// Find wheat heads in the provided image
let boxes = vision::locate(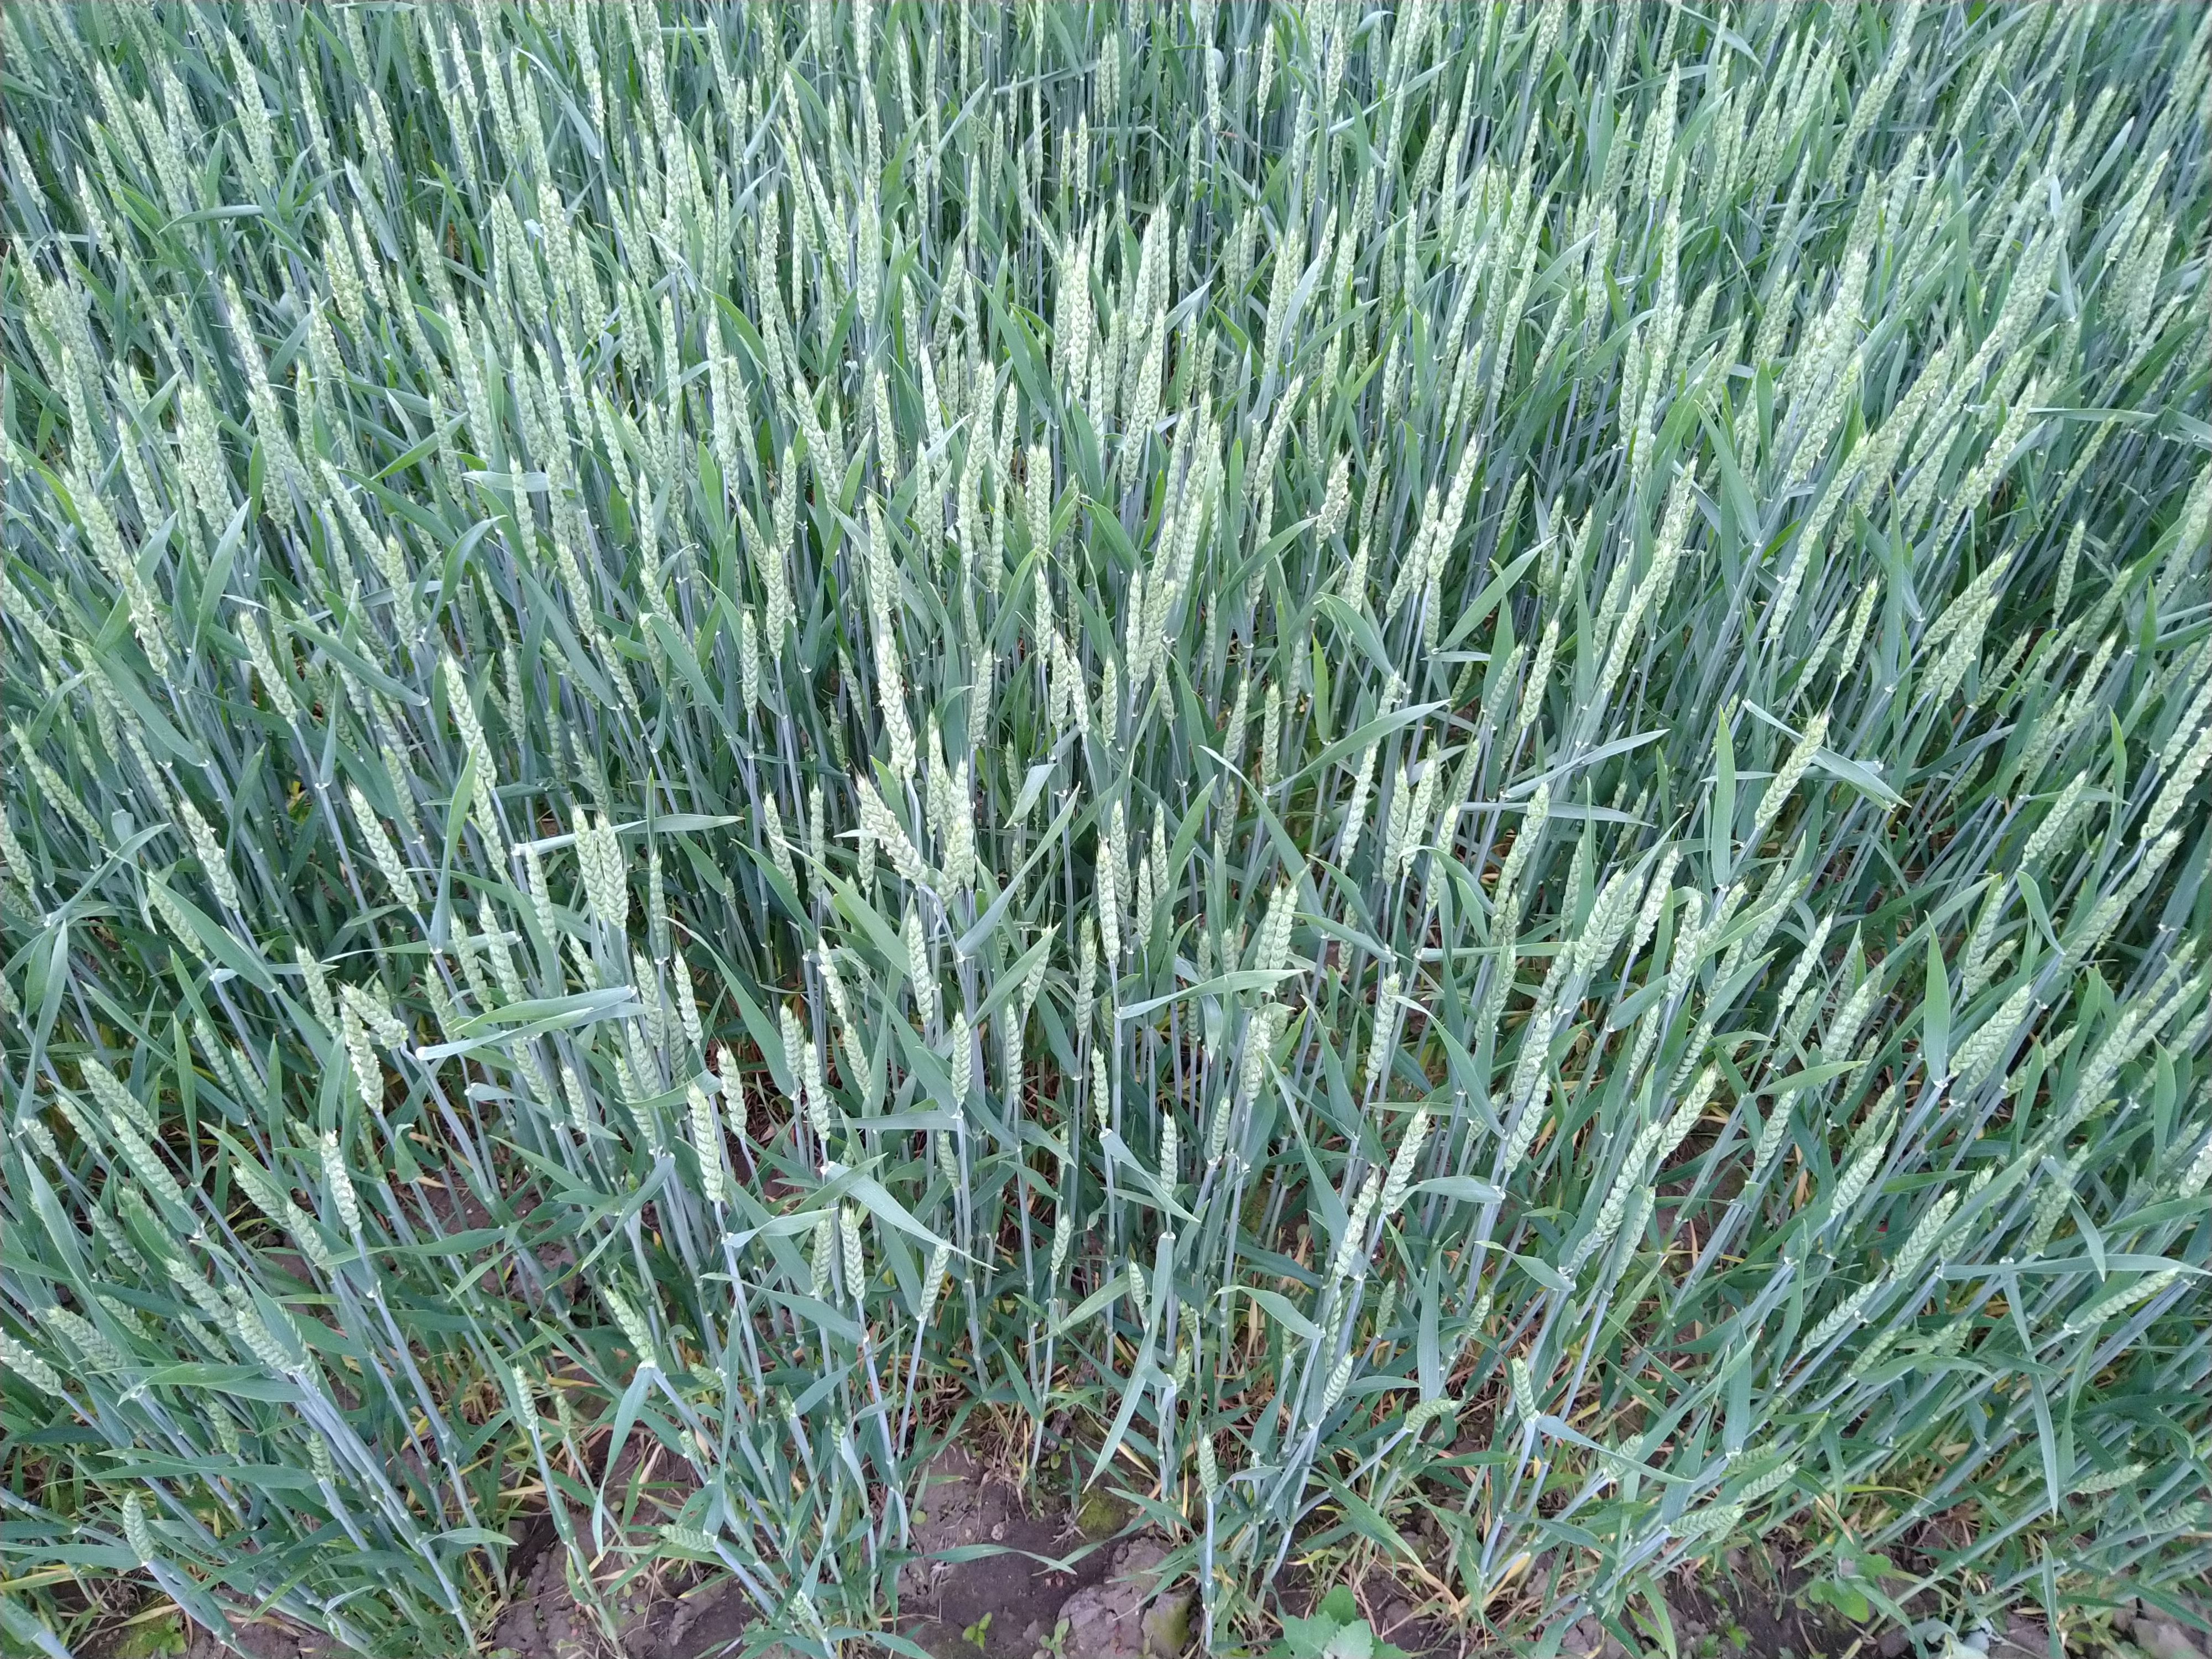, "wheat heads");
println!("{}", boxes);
[551,192,577,285]
[626,1172,640,1193]
[1672,287,1715,381]
[1967,940,2016,994]
[1451,660,1474,707]
[452,25,478,116]
[164,82,187,171]
[493,126,511,172]
[354,105,388,198]
[639,192,671,263]
[1089,354,1103,456]
[1755,141,1786,216]
[1384,86,1405,176]
[1497,472,1529,545]
[794,383,841,509]
[915,442,931,535]
[1381,229,1396,315]
[1199,330,1217,393]
[1257,24,1274,115]
[226,31,270,131]
[1061,127,1070,187]
[1633,849,1681,947]
[542,638,599,707]
[224,1286,293,1369]
[938,765,974,906]
[1793,611,1847,694]
[1833,444,1898,547]
[1284,232,1299,304]
[1305,208,1338,310]
[1829,0,1847,28]
[1810,437,1870,528]
[1574,875,1626,972]
[666,484,686,520]
[1499,170,1509,206]
[1618,330,1641,443]
[2029,1093,2119,1150]
[1505,171,1532,240]
[1560,509,1593,606]
[1617,791,1649,850]
[1736,1464,1797,1502]
[1977,153,2028,225]
[1715,53,1730,99]
[817,940,859,1048]
[1500,1,1524,48]
[96,70,124,149]
[1111,35,1120,103]
[471,484,491,520]
[1358,451,1382,539]
[0,881,43,927]
[269,596,291,666]
[1307,399,1320,471]
[615,1057,656,1147]
[1522,621,1559,724]
[0,1331,62,1394]
[575,232,604,332]
[1231,917,1246,971]
[89,681,120,761]
[717,1093,748,1135]
[746,220,756,289]
[130,369,178,466]
[138,3,169,56]
[738,506,769,583]
[1224,680,1249,761]
[840,1208,865,1297]
[806,161,842,258]
[303,666,360,752]
[1758,37,1795,129]
[1035,446,1052,561]
[762,316,788,419]
[810,786,825,886]
[1725,110,1746,188]
[281,267,305,320]
[1163,417,1189,520]
[338,662,369,719]
[575,0,594,85]
[385,272,409,336]
[179,390,197,467]
[1363,168,1376,236]
[1593,555,1629,655]
[1606,1436,1644,1478]
[1198,932,1212,982]
[850,539,861,604]
[47,1309,128,1371]
[1474,948,1517,1049]
[194,390,217,440]
[1152,804,1170,900]
[1837,951,1857,1010]
[27,1190,45,1220]
[1333,230,1357,316]
[1949,988,2032,1076]
[34,2,70,67]
[310,335,338,426]
[938,780,953,850]
[1534,941,1574,1017]
[296,362,327,495]
[513,346,542,463]
[1432,439,1480,564]
[323,245,361,338]
[1921,602,1999,697]
[1929,112,1945,150]
[2196,1072,2212,1104]
[693,626,701,651]
[1481,240,1512,341]
[1998,274,2016,364]
[1491,292,1523,403]
[1518,197,1549,267]
[1756,717,1830,828]
[835,199,849,264]
[2056,899,2123,975]
[120,1190,191,1265]
[1843,1037,1879,1102]
[151,114,186,188]
[1668,1022,1713,1093]
[1643,312,1659,353]
[734,84,747,162]
[830,403,845,482]
[972,33,982,85]
[1035,570,1052,658]
[1369,674,1399,748]
[1719,881,1803,995]
[991,112,1004,195]
[165,300,193,346]
[602,1289,655,1362]
[1241,422,1263,497]
[1164,66,1171,108]
[1076,918,1098,1034]
[1647,67,1678,199]
[181,805,240,908]
[2040,803,2095,864]
[1340,747,1377,871]
[1158,674,1174,721]
[1867,355,1947,453]
[1292,90,1309,172]
[278,1305,320,1391]
[1610,783,1627,822]
[287,1203,333,1270]
[1921,557,2014,648]
[707,19,735,118]
[341,1004,386,1111]
[902,276,919,364]
[1454,741,1481,805]
[1390,365,1406,424]
[2039,108,2075,193]
[1503,251,1538,337]
[957,484,973,570]
[1385,1,1411,92]
[569,934,600,990]
[1952,46,2004,133]
[1913,649,1940,704]
[121,250,160,319]
[1780,25,1815,131]
[1532,293,1573,381]
[304,36,321,91]
[1324,1355,1354,1407]
[1428,742,1444,812]
[368,90,394,157]
[243,1,277,53]
[114,361,132,402]
[74,646,145,734]
[658,1524,717,1552]
[2076,570,2133,645]
[1610,33,1626,88]
[1387,544,1417,615]
[1790,363,1859,477]
[1241,1014,1272,1100]
[1792,42,1832,132]
[147,878,205,957]
[2154,486,2212,603]
[447,308,494,461]
[1656,218,1679,346]
[91,461,119,526]
[291,484,324,511]
[2002,1029,2078,1094]
[2070,1465,2147,1493]
[592,387,633,502]
[867,498,901,611]
[914,484,933,541]
[11,727,58,807]
[1093,1093,1110,1126]
[609,84,623,159]
[184,0,221,65]
[117,421,164,532]
[526,847,556,939]
[1651,461,1698,566]
[876,620,917,776]
[2151,1503,2205,1533]
[1417,195,1430,239]
[1005,742,1021,805]
[1615,1187,1655,1278]
[1129,1262,1147,1306]
[123,1492,153,1561]
[381,746,418,830]
[1018,146,1029,226]
[1177,502,1204,596]
[538,188,561,279]
[1601,553,1668,687]
[1755,111,1780,182]
[948,335,959,417]
[1067,559,1079,647]
[793,1593,811,1621]
[256,1,282,61]
[2033,121,2053,159]
[335,422,364,476]
[0,571,63,659]
[1915,1323,1958,1355]
[1755,1090,1796,1169]
[321,1131,362,1230]
[1625,1,1641,69]
[1077,113,1088,200]
[1919,1321,1973,1374]
[688,145,707,229]
[1488,171,1499,217]
[224,278,270,397]
[386,692,405,720]
[836,86,847,137]
[1110,801,1131,908]
[1377,1280,1397,1334]
[858,359,876,441]
[1270,887,1300,971]
[1827,80,1880,175]
[472,774,506,869]
[2019,694,2066,768]
[1138,859,1153,946]
[2052,419,2117,506]
[1774,151,1811,248]
[416,222,449,291]
[1933,468,1976,555]
[1146,309,1165,421]
[858,789,875,884]
[1734,383,1758,438]
[320,464,397,565]
[1338,903,1357,971]
[1179,1300,1197,1335]
[1177,226,1188,283]
[859,0,872,65]
[1153,644,1174,719]
[1410,127,1436,197]
[1006,1003,1023,1096]
[1426,805,1459,905]
[11,234,53,325]
[1181,314,1198,406]
[1350,176,1364,228]
[303,664,334,711]
[628,1021,662,1099]
[604,1018,626,1054]
[0,805,34,890]
[1010,78,1017,132]
[48,290,80,359]
[1103,313,1118,413]
[1583,292,1609,363]
[2171,52,2212,123]
[1578,1,1597,39]
[793,212,803,313]
[2085,765,2116,820]
[2132,1011,2211,1098]
[111,0,152,61]
[557,545,595,636]
[1157,150,1164,194]
[665,139,681,243]
[112,1118,184,1203]
[606,190,645,278]
[1901,44,1931,119]
[62,253,89,319]
[478,903,525,1006]
[727,358,745,422]
[1410,103,1449,198]
[341,986,406,1047]
[1223,235,1238,302]
[1766,1396,1784,1416]
[294,534,330,607]
[1504,1073,1551,1170]
[1821,970,1884,1063]
[1980,222,2016,286]
[295,946,337,1035]
[118,563,168,674]
[1030,214,1063,269]
[2140,1145,2212,1207]
[546,463,570,547]
[188,169,208,209]
[1874,165,1902,203]
[842,1142,855,1169]
[1335,557,1353,600]
[546,709,568,786]
[865,92,881,189]
[1585,207,1613,314]
[1307,145,1319,211]
[1855,724,1873,760]
[780,1005,800,1075]
[232,1048,269,1107]
[2074,1271,2178,1330]
[1628,112,1657,210]
[1456,166,1488,260]
[1699,884,1747,958]
[291,602,319,632]
[243,236,269,298]
[348,789,418,910]
[2103,222,2150,313]
[970,488,992,582]
[1282,1326,1293,1359]
[1512,1010,1552,1100]
[2033,1145,2089,1216]
[1709,321,1741,378]
[1866,48,1910,124]
[1886,431,1959,528]
[804,1043,830,1137]
[1832,1146,1886,1213]
[351,211,390,309]
[2184,275,2212,323]
[530,120,552,190]
[1380,1113,1431,1213]
[1316,460,1349,544]
[2005,276,2051,353]
[617,283,637,366]
[1120,355,1155,488]
[675,514,708,608]
[779,447,797,548]
[1365,974,1401,1080]
[2145,642,2202,707]
[1200,1437,1217,1493]
[702,212,716,288]
[1051,632,1069,726]
[1222,929,1236,974]
[23,1120,60,1160]
[1629,1005,1660,1077]
[96,1296,151,1341]
[75,166,115,256]
[443,660,496,783]
[639,616,669,689]
[126,734,173,813]
[772,497,781,541]
[668,1006,687,1088]
[1493,785,1551,920]
[2017,502,2045,543]
[1908,323,2013,458]
[637,1,650,44]
[2097,910,2124,948]
[1218,783,1237,855]
[555,280,576,349]
[1542,568,1555,628]
[1096,843,1120,962]
[502,649,526,739]
[2020,622,2081,692]
[1600,105,1631,198]
[2027,1192,2072,1254]
[1203,591,1217,668]
[963,585,983,662]
[1331,132,1343,182]
[807,1093,836,1138]
[250,399,313,512]
[309,292,345,379]
[1052,1215,1071,1268]
[716,174,730,273]
[10,728,105,839]
[1910,176,1936,229]
[1792,873,1812,900]
[830,703,845,770]
[2149,197,2166,234]
[1665,306,1684,356]
[1247,490,1274,606]
[1709,1524,1737,1542]
[977,99,992,142]
[1170,459,1203,563]
[990,485,1005,588]
[857,209,875,319]
[425,23,452,115]
[1977,351,2023,425]
[1892,1,1922,61]
[1512,1358,1533,1419]
[486,681,513,729]
[821,0,833,56]
[1659,1070,1717,1157]
[1573,75,1592,136]
[1485,646,1524,721]
[1033,88,1042,177]
[1530,2,1564,78]
[1262,684,1280,784]
[646,404,668,479]
[1736,111,1767,185]
[661,297,680,405]
[1558,99,1572,135]
[525,76,550,176]
[1500,713,1523,765]
[1189,127,1199,195]
[511,459,539,564]
[625,3,644,63]
[681,1431,700,1461]
[1761,284,1798,360]
[1632,350,1665,482]
[1223,355,1238,400]
[593,71,604,132]
[569,732,610,816]
[1069,252,1090,392]
[1059,1128,1068,1177]
[153,322,193,392]
[1751,268,1787,358]
[2137,942,2197,1015]
[1034,795,1041,824]
[1706,938,1743,1004]
[2102,153,2148,219]
[1730,82,1748,124]
[968,650,994,743]
[354,104,375,151]
[595,815,629,926]
[2034,191,2075,279]
[673,953,703,1046]
[1344,1,1363,57]
[1982,185,2040,276]
[510,51,528,133]
[689,1363,726,1391]
[1349,535,1370,613]
[1441,135,1459,241]
[1101,38,1111,114]
[239,615,297,723]
[2142,730,2212,838]
[148,580,182,653]
[1213,1098,1231,1156]
[2200,816,2212,879]
[1354,299,1368,375]
[875,373,894,475]
[1752,865,1785,915]
[133,103,162,160]
[513,1367,537,1421]
[2,16,36,85]
[2183,218,2211,261]
[1332,1174,1379,1280]
[1778,917,1834,1015]
[999,383,1018,482]
[773,287,796,362]
[298,69,331,174]
[1103,658,1118,740]
[784,72,802,137]
[552,494,580,551]
[0,625,15,662]
[1308,308,1323,378]
[561,1068,589,1131]
[1310,1,1323,64]
[2064,1083,2117,1128]
[831,1417,842,1451]
[932,250,965,355]
[1160,207,1170,308]
[2060,91,2114,176]
[1768,403,1796,466]
[1377,673,1400,719]
[2000,230,2045,318]
[937,1133,960,1187]
[1779,316,1822,393]
[2061,638,2118,726]
[70,446,92,497]
[40,665,66,720]
[822,484,843,512]
[166,302,226,394]
[915,143,929,222]
[79,1060,157,1134]
[725,877,735,907]
[1253,378,1304,495]
[1160,1114,1177,1195]
[180,484,210,579]
[686,383,707,437]
[2104,156,2168,261]
[2004,351,2035,402]
[1668,1505,1743,1537]
[926,35,937,110]
[587,757,610,817]
[1022,930,1049,1012]
[640,572,699,663]
[683,433,700,479]
[1586,194,1601,232]
[605,1,618,69]
[1848,1085,1896,1151]
[927,712,945,830]
[648,51,668,138]
[742,612,759,711]
[1464,1296,1492,1337]
[1706,130,1733,214]
[1960,968,2016,999]
[964,273,981,369]
[812,1221,833,1289]
[1187,994,1198,1046]
[752,77,764,149]
[838,647,864,721]
[526,365,552,434]
[450,918,493,1012]
[648,2,665,71]
[452,95,475,178]
[430,484,454,518]
[2119,299,2182,380]
[1561,837,1585,926]
[898,38,914,130]
[424,967,463,1043]
[639,484,660,576]
[1964,886,2006,990]
[1841,580,1879,673]
[1665,157,1686,221]
[484,293,509,359]
[180,1314,235,1365]
[2003,1,2050,66]
[398,279,450,402]
[1120,326,1139,425]
[1133,219,1157,331]
[829,101,843,194]
[110,62,139,124]
[767,548,785,654]
[430,394,466,507]
[556,1395,571,1432]
[144,91,169,151]
[489,967,527,1025]
[1445,349,1468,430]
[356,640,402,714]
[89,378,111,423]
[2113,832,2185,912]
[370,690,412,770]
[634,211,659,280]
[414,523,444,578]
[1962,109,2015,195]
[43,493,78,561]
[2090,522,2125,577]
[2022,775,2087,863]
[1428,483,1472,578]
[2118,981,2201,1060]
[2163,464,2212,565]
[194,1020,243,1102]
[228,135,257,203]
[5,127,45,207]
[344,9,372,84]
[1712,696,1739,749]
[1027,446,1038,541]
[207,1402,240,1454]
[785,138,818,245]
[1244,211,1260,283]
[500,197,548,321]
[1987,86,2033,150]
[1068,658,1088,729]
[674,122,693,211]
[64,490,178,672]
[0,955,20,1012]
[999,932,1010,962]
[2147,329,2202,392]
[233,1166,292,1229]
[856,780,929,882]
[2159,678,2212,772]
[1706,967,1761,1006]
[1967,1028,2015,1090]
[1740,410,1760,482]
[704,110,717,182]
[154,162,196,245]
[483,888,502,946]
[44,766,106,841]
[1014,1,1027,36]
[843,1023,871,1095]
[1721,1442,1778,1477]
[355,604,391,665]
[56,1098,100,1151]
[633,955,665,1048]
[323,1,343,38]
[717,1048,747,1135]
[761,193,779,285]
[49,1,89,69]
[624,138,635,199]
[1326,21,1344,110]
[932,485,943,564]
[90,1207,153,1277]
[1761,1,1798,54]
[357,1109,385,1181]
[2170,10,2211,94]
[1713,97,1731,144]
[1439,50,1451,103]
[401,12,423,85]
[1768,528,1818,636]
[2128,233,2170,338]
[763,794,798,894]
[1571,198,1588,295]
[1035,0,1044,51]
[1743,78,1757,112]
[1538,497,1564,585]
[2019,729,2061,796]
[1891,1192,1959,1279]
[1382,770,1410,882]
[2040,1,2074,50]
[170,75,205,146]
[1381,335,1400,411]
[24,316,69,400]
[2078,1013,2138,1092]
[1058,502,1076,573]
[1883,138,1923,241]
[1137,582,1176,680]
[1243,1011,1289,1049]
[233,100,270,182]
[968,154,980,241]
[1834,1,1859,52]
[2056,323,2081,381]
[1170,1,1178,45]
[1403,760,1436,865]
[1206,34,1221,129]
[1370,17,1381,78]
[62,349,103,473]
[1081,916,1094,952]
[1174,1348,1190,1392]
[1450,243,1488,372]
[1385,489,1441,615]
[97,1,122,44]
[1977,633,2031,703]
[1668,897,1703,996]
[308,1432,334,1483]
[71,718,99,778]
[643,137,662,214]
[622,417,658,480]
[295,1121,323,1180]
[512,1039,551,1107]
[568,507,590,560]
[324,506,354,602]
[556,328,595,447]
[1802,1282,1881,1352]
[480,570,510,641]
[85,117,124,208]
[1951,753,1986,796]
[484,54,518,151]
[386,537,417,645]
[1365,484,1388,543]
[1092,1048,1108,1125]
[2100,763,2116,791]
[572,808,607,917]
[1468,1094,1504,1142]
[687,1086,723,1200]
[1656,3,1682,72]
[1411,2,1432,64]
[784,585,797,624]
[560,1,580,51]
[967,364,996,482]
[1144,517,1175,621]
[1423,580,1441,650]
[1209,484,1220,543]
[1012,841,1026,905]
[1939,1171,1996,1258]
[1052,287,1070,386]
[1025,484,1050,547]
[1594,1125,1663,1235]
[96,64,147,172]
[2094,87,2130,149]
[1700,455,1721,488]
[2044,11,2082,81]
[595,634,639,714]
[908,915,933,1020]
[1894,203,1943,299]
[734,559,742,609]
[456,584,476,640]
[345,160,378,233]
[1322,331,1341,401]
[1795,257,1870,390]
[1839,173,1876,273]
[166,1262,240,1335]
[1286,638,1305,719]
[1520,109,1541,172]
[1263,252,1285,368]
[491,199,510,304]
[1197,392,1211,451]
[1704,342,1742,414]
[2053,521,2086,618]
[1016,488,1029,535]
[1463,344,1482,415]
[1324,1290,1342,1371]
[921,1245,951,1312]
[2188,635,2212,685]
[907,213,915,248]
[631,285,655,372]
[762,11,776,84]
[2186,318,2212,375]
[1102,995,1114,1038]
[1095,210,1107,276]
[1014,484,1026,521]
[1407,1398,1458,1430]
[1254,887,1283,969]
[650,855,668,954]
[577,510,595,565]
[1850,1326,1907,1375]
[535,344,572,461]
[1480,0,1495,56]
[53,581,93,647]
[1404,208,1417,303]
[326,213,367,313]
[953,1012,971,1098]
[194,429,242,539]
[174,489,188,539]
[1780,990,1819,1053]
[2195,1436,2212,1455]
[1969,381,2038,506]
[2159,1123,2205,1172]
[1599,1438,1610,1467]
[1126,571,1142,674]
[1608,213,1617,256]
[1456,62,1475,147]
